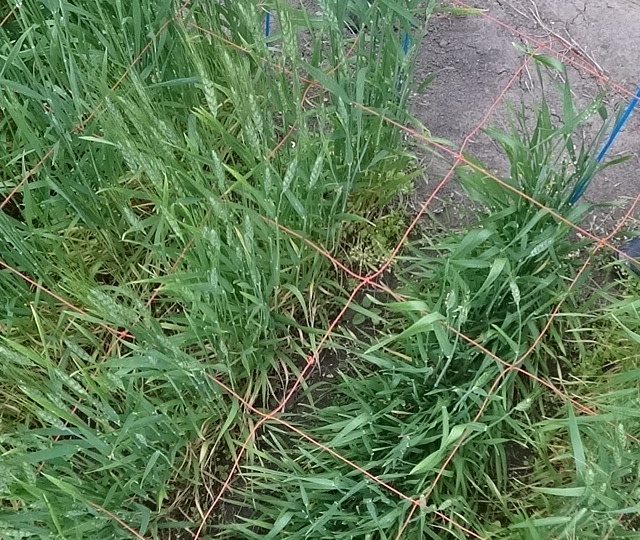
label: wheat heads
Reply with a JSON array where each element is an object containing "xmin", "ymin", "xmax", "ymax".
[
  {"xmin": 208, "ymin": 267, "xmax": 218, "ymax": 287},
  {"xmin": 244, "ymin": 213, "xmax": 254, "ymax": 239},
  {"xmin": 397, "ymin": 43, "xmax": 414, "ymax": 67},
  {"xmin": 274, "ymin": 81, "xmax": 288, "ymax": 108},
  {"xmin": 208, "ymin": 231, "xmax": 221, "ymax": 251},
  {"xmin": 247, "ymin": 94, "xmax": 262, "ymax": 130},
  {"xmin": 445, "ymin": 290, "xmax": 455, "ymax": 309},
  {"xmin": 161, "ymin": 203, "xmax": 181, "ymax": 234},
  {"xmin": 90, "ymin": 286, "xmax": 135, "ymax": 324},
  {"xmin": 309, "ymin": 155, "xmax": 326, "ymax": 184},
  {"xmin": 20, "ymin": 463, "xmax": 37, "ymax": 484},
  {"xmin": 332, "ymin": 36, "xmax": 348, "ymax": 75},
  {"xmin": 262, "ymin": 163, "xmax": 272, "ymax": 193},
  {"xmin": 18, "ymin": 381, "xmax": 44, "ymax": 404},
  {"xmin": 66, "ymin": 337, "xmax": 92, "ymax": 363},
  {"xmin": 607, "ymin": 449, "xmax": 627, "ymax": 463},
  {"xmin": 0, "ymin": 528, "xmax": 33, "ymax": 536},
  {"xmin": 133, "ymin": 432, "xmax": 149, "ymax": 445},
  {"xmin": 242, "ymin": 120, "xmax": 262, "ymax": 155},
  {"xmin": 122, "ymin": 204, "xmax": 143, "ymax": 231},
  {"xmin": 233, "ymin": 1, "xmax": 262, "ymax": 41},
  {"xmin": 168, "ymin": 175, "xmax": 185, "ymax": 197},
  {"xmin": 2, "ymin": 344, "xmax": 32, "ymax": 364},
  {"xmin": 66, "ymin": 508, "xmax": 84, "ymax": 517},
  {"xmin": 130, "ymin": 70, "xmax": 153, "ymax": 115},
  {"xmin": 116, "ymin": 141, "xmax": 134, "ymax": 174},
  {"xmin": 36, "ymin": 412, "xmax": 64, "ymax": 429},
  {"xmin": 50, "ymin": 393, "xmax": 71, "ymax": 413},
  {"xmin": 2, "ymin": 434, "xmax": 26, "ymax": 446},
  {"xmin": 134, "ymin": 303, "xmax": 150, "ymax": 320},
  {"xmin": 457, "ymin": 302, "xmax": 469, "ymax": 328},
  {"xmin": 210, "ymin": 153, "xmax": 225, "ymax": 189},
  {"xmin": 149, "ymin": 128, "xmax": 174, "ymax": 159},
  {"xmin": 280, "ymin": 157, "xmax": 298, "ymax": 189},
  {"xmin": 51, "ymin": 365, "xmax": 84, "ymax": 392},
  {"xmin": 171, "ymin": 278, "xmax": 195, "ymax": 295},
  {"xmin": 106, "ymin": 370, "xmax": 126, "ymax": 391},
  {"xmin": 140, "ymin": 154, "xmax": 162, "ymax": 189},
  {"xmin": 157, "ymin": 334, "xmax": 179, "ymax": 353},
  {"xmin": 198, "ymin": 67, "xmax": 217, "ymax": 115},
  {"xmin": 600, "ymin": 483, "xmax": 608, "ymax": 496},
  {"xmin": 279, "ymin": 11, "xmax": 294, "ymax": 59},
  {"xmin": 585, "ymin": 492, "xmax": 594, "ymax": 506},
  {"xmin": 223, "ymin": 51, "xmax": 238, "ymax": 84},
  {"xmin": 582, "ymin": 470, "xmax": 595, "ymax": 484},
  {"xmin": 337, "ymin": 99, "xmax": 353, "ymax": 124},
  {"xmin": 615, "ymin": 425, "xmax": 628, "ymax": 449},
  {"xmin": 319, "ymin": 4, "xmax": 337, "ymax": 30},
  {"xmin": 508, "ymin": 282, "xmax": 520, "ymax": 303},
  {"xmin": 102, "ymin": 98, "xmax": 127, "ymax": 130},
  {"xmin": 29, "ymin": 500, "xmax": 42, "ymax": 510},
  {"xmin": 117, "ymin": 96, "xmax": 144, "ymax": 135},
  {"xmin": 209, "ymin": 198, "xmax": 223, "ymax": 217}
]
